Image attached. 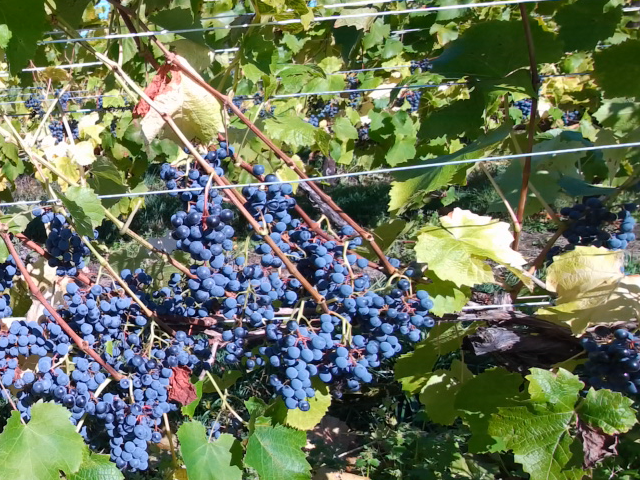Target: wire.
<instances>
[{"label": "wire", "mask_w": 640, "mask_h": 480, "mask_svg": "<svg viewBox=\"0 0 640 480\" xmlns=\"http://www.w3.org/2000/svg\"><path fill=\"white\" fill-rule=\"evenodd\" d=\"M520 0H482L471 3L470 5H449V4H440V5H432V6H421L418 8H409V9H400L395 11L388 12H371V11H352L341 13L337 15H329V16H317L312 17L311 21L316 22L317 20H339L343 18L353 17L354 19H367L374 17H390L397 16L402 14H411V13H420L423 11H434V10H467L471 12L473 8L484 5H495V4H517Z\"/></svg>", "instance_id": "wire-3"}, {"label": "wire", "mask_w": 640, "mask_h": 480, "mask_svg": "<svg viewBox=\"0 0 640 480\" xmlns=\"http://www.w3.org/2000/svg\"><path fill=\"white\" fill-rule=\"evenodd\" d=\"M637 146H640V141L627 142L624 144H605V145H599V146L559 148V149H552L544 152H524V153H517L513 155H504L502 157L462 158V159H458L455 161H448V162L419 163L415 165L394 166L390 168L369 170V171H353L347 174H329V175H323V176L313 177V178H296V179H279V180H268V181L211 184L209 186V189L214 190V189H227V188H238V187L270 186V185H281V184L315 183V182H321V181H326L331 179H349L355 176L380 175V174H387V173H392L397 171L417 170L421 168L450 167V166L461 165L464 163L504 162L506 160H515V159L526 158V157H546V156H551L554 154H561V153L601 151V150H607V149H626L629 147H637Z\"/></svg>", "instance_id": "wire-1"}, {"label": "wire", "mask_w": 640, "mask_h": 480, "mask_svg": "<svg viewBox=\"0 0 640 480\" xmlns=\"http://www.w3.org/2000/svg\"><path fill=\"white\" fill-rule=\"evenodd\" d=\"M304 22H305L304 18H279V19H268L264 21H248L243 24H233L229 26L191 27V28H183V29H168L164 31H149V32H138V33L114 31L112 33L94 34V35H86V36H80V37H65L58 40H40L39 44L40 45H60L67 42H82V41H88V40L114 38L116 36L127 37V38H140V37H152V36H166L170 34H185V33H193V32L232 31L235 29H246L250 26H266L270 24L304 23Z\"/></svg>", "instance_id": "wire-2"}, {"label": "wire", "mask_w": 640, "mask_h": 480, "mask_svg": "<svg viewBox=\"0 0 640 480\" xmlns=\"http://www.w3.org/2000/svg\"><path fill=\"white\" fill-rule=\"evenodd\" d=\"M204 191V185H196V186H179L174 188H163L160 191L158 190H132L129 192H121V193H110V194H99V199H112V198H123V197H131L135 195H156V196H167L170 193H176L181 191Z\"/></svg>", "instance_id": "wire-4"}, {"label": "wire", "mask_w": 640, "mask_h": 480, "mask_svg": "<svg viewBox=\"0 0 640 480\" xmlns=\"http://www.w3.org/2000/svg\"><path fill=\"white\" fill-rule=\"evenodd\" d=\"M553 301L552 300H541V301H529L526 303H497V302H491V303H477L474 305H469V306H465L464 310L465 311H471V310H476L479 308H525V307H531V306H544V305H552Z\"/></svg>", "instance_id": "wire-5"}, {"label": "wire", "mask_w": 640, "mask_h": 480, "mask_svg": "<svg viewBox=\"0 0 640 480\" xmlns=\"http://www.w3.org/2000/svg\"><path fill=\"white\" fill-rule=\"evenodd\" d=\"M60 202H61L60 198L35 199V200H24V201H7V202H0V207L26 206V205L50 204V203H60Z\"/></svg>", "instance_id": "wire-6"}]
</instances>
